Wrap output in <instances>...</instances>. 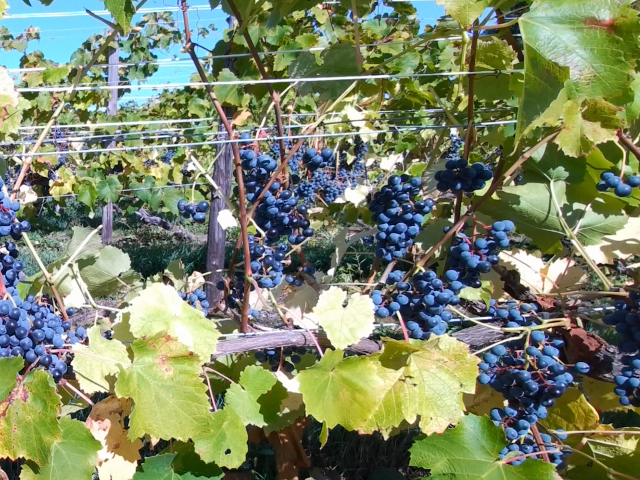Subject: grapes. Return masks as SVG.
Instances as JSON below:
<instances>
[{
  "mask_svg": "<svg viewBox=\"0 0 640 480\" xmlns=\"http://www.w3.org/2000/svg\"><path fill=\"white\" fill-rule=\"evenodd\" d=\"M530 339L531 346H528L525 352L537 357L538 367L547 371L552 377L545 382V385L539 386L538 381L533 379L531 371L516 367L526 363L525 353L520 354L521 358L510 357L503 344H496L491 349V353L485 355V362L479 364L483 372L477 378V382L483 386L491 385L509 400L510 407H505L503 410L492 408L489 411L493 423L500 425L506 416L516 417L518 420L507 425L505 434L509 439H520L525 435L523 444L508 443L504 446L497 455L499 460H503L510 451L519 452L521 455L541 452V448L535 444V437L528 433L529 429L539 419H545L548 416L546 407H552L555 404L554 399H559L568 389L569 384L574 381V375L567 372L564 365H560L553 359L561 356L560 348L566 345L563 338L549 339V334L534 330L530 334ZM543 341L551 344L545 345L540 351L538 343ZM499 356H502L503 362L511 367L510 370H503L500 374L495 373L501 369L498 362Z\"/></svg>",
  "mask_w": 640,
  "mask_h": 480,
  "instance_id": "01657485",
  "label": "grapes"
},
{
  "mask_svg": "<svg viewBox=\"0 0 640 480\" xmlns=\"http://www.w3.org/2000/svg\"><path fill=\"white\" fill-rule=\"evenodd\" d=\"M490 236L479 237L475 241L478 253H471V242L473 238L466 233L458 232L454 236V243L449 247L450 256L446 259L448 269L444 272V279L450 282L449 288H441L444 281L437 276L434 270L417 272L413 276L415 289L422 295L399 294L388 306H380L384 302V294L379 290H374L370 299L373 302L374 312L380 318L394 317L401 309V305L425 304V310H420L418 316L428 325L427 330L417 320H409L406 328L411 331V337L416 340H426L431 332L443 335L448 329L445 322L453 318V314L446 310L448 305H457L460 296L456 291L465 290L468 286L479 288L481 282L478 279L480 274H488L492 264H500L499 257L493 254V249L498 245L507 248L510 245L508 233L516 228L512 219L495 221L491 225Z\"/></svg>",
  "mask_w": 640,
  "mask_h": 480,
  "instance_id": "b958b902",
  "label": "grapes"
},
{
  "mask_svg": "<svg viewBox=\"0 0 640 480\" xmlns=\"http://www.w3.org/2000/svg\"><path fill=\"white\" fill-rule=\"evenodd\" d=\"M8 255L0 254V273L6 291L12 294L18 306L13 307L10 300L0 296V358L17 357L33 364L38 358L42 365L48 367L53 381L59 383L67 373L68 364L61 361L57 354L45 352V346L52 345L57 349L66 347L63 334H67L69 343L74 345L87 337L81 325L70 330L71 324L63 319L62 314L53 312V305L35 303V297L28 295L26 301L15 287L19 285L18 273L24 269V262L17 260L19 251L13 242L5 244Z\"/></svg>",
  "mask_w": 640,
  "mask_h": 480,
  "instance_id": "0513c4c2",
  "label": "grapes"
},
{
  "mask_svg": "<svg viewBox=\"0 0 640 480\" xmlns=\"http://www.w3.org/2000/svg\"><path fill=\"white\" fill-rule=\"evenodd\" d=\"M423 184L421 177L410 180L408 174H394L387 179L381 191L374 193L369 210L375 213L370 220L377 223L380 231L375 234L379 240L376 255L385 262L406 256L408 248L414 243L412 238L420 234L423 219L435 205L432 198L411 204V199L421 192L420 186Z\"/></svg>",
  "mask_w": 640,
  "mask_h": 480,
  "instance_id": "84f90ec7",
  "label": "grapes"
},
{
  "mask_svg": "<svg viewBox=\"0 0 640 480\" xmlns=\"http://www.w3.org/2000/svg\"><path fill=\"white\" fill-rule=\"evenodd\" d=\"M280 187V182L275 180L256 211L255 220L263 226L264 232L267 234L264 239L267 246H273L279 240V235H289L288 241L294 244H300L306 237L314 235L309 219L296 217L290 212L292 208L296 207L301 215L308 213V208L305 205L297 206L299 203L297 197L291 196L289 190L281 191L279 198L272 197Z\"/></svg>",
  "mask_w": 640,
  "mask_h": 480,
  "instance_id": "f8a65327",
  "label": "grapes"
},
{
  "mask_svg": "<svg viewBox=\"0 0 640 480\" xmlns=\"http://www.w3.org/2000/svg\"><path fill=\"white\" fill-rule=\"evenodd\" d=\"M493 178L494 174L480 162L467 166V160L464 158L448 160L445 170L435 173V189L442 193L450 190L453 194H457L458 190L474 192L482 190Z\"/></svg>",
  "mask_w": 640,
  "mask_h": 480,
  "instance_id": "5460f4e3",
  "label": "grapes"
},
{
  "mask_svg": "<svg viewBox=\"0 0 640 480\" xmlns=\"http://www.w3.org/2000/svg\"><path fill=\"white\" fill-rule=\"evenodd\" d=\"M249 240L252 279L258 281L261 288L278 286L285 269L282 260L286 257V253L292 250V246L287 242H280L277 248H265L262 244L256 245L253 233H249ZM263 265L273 267L268 271L270 278H262L264 276Z\"/></svg>",
  "mask_w": 640,
  "mask_h": 480,
  "instance_id": "83cd7487",
  "label": "grapes"
},
{
  "mask_svg": "<svg viewBox=\"0 0 640 480\" xmlns=\"http://www.w3.org/2000/svg\"><path fill=\"white\" fill-rule=\"evenodd\" d=\"M243 171H247L243 178L246 198L254 202L262 188L266 185L271 176V172L277 167V160L269 154H257L253 149L239 148Z\"/></svg>",
  "mask_w": 640,
  "mask_h": 480,
  "instance_id": "e5b3c951",
  "label": "grapes"
},
{
  "mask_svg": "<svg viewBox=\"0 0 640 480\" xmlns=\"http://www.w3.org/2000/svg\"><path fill=\"white\" fill-rule=\"evenodd\" d=\"M620 364L623 366L620 369L622 375L614 378V383L618 385L615 393L620 396L619 403L622 406H629L631 404L629 397L635 393V388L640 386V378L634 375L635 369H640V352L632 356H623Z\"/></svg>",
  "mask_w": 640,
  "mask_h": 480,
  "instance_id": "2adb6a1f",
  "label": "grapes"
},
{
  "mask_svg": "<svg viewBox=\"0 0 640 480\" xmlns=\"http://www.w3.org/2000/svg\"><path fill=\"white\" fill-rule=\"evenodd\" d=\"M21 209L18 202H13L5 193L0 190V237L10 235L14 240L19 241L21 233H28L31 230V223L28 220L21 222L14 220L17 218V211Z\"/></svg>",
  "mask_w": 640,
  "mask_h": 480,
  "instance_id": "ef6de9ee",
  "label": "grapes"
},
{
  "mask_svg": "<svg viewBox=\"0 0 640 480\" xmlns=\"http://www.w3.org/2000/svg\"><path fill=\"white\" fill-rule=\"evenodd\" d=\"M599 179L601 181L595 185V189L599 192L613 189V194L618 199L629 198L633 193V188H637L640 185L638 176H631L626 183L620 176H616L614 171H603L599 175Z\"/></svg>",
  "mask_w": 640,
  "mask_h": 480,
  "instance_id": "1ff8f66d",
  "label": "grapes"
},
{
  "mask_svg": "<svg viewBox=\"0 0 640 480\" xmlns=\"http://www.w3.org/2000/svg\"><path fill=\"white\" fill-rule=\"evenodd\" d=\"M496 304L495 299H490V308L488 309V313L495 318H510L514 317L512 322L506 323L507 328H519L521 324H525L527 322V318L523 317L520 311L516 307H511L515 305V301H506L504 306L511 307L508 308H498L494 306Z\"/></svg>",
  "mask_w": 640,
  "mask_h": 480,
  "instance_id": "54f908b8",
  "label": "grapes"
},
{
  "mask_svg": "<svg viewBox=\"0 0 640 480\" xmlns=\"http://www.w3.org/2000/svg\"><path fill=\"white\" fill-rule=\"evenodd\" d=\"M210 209V203L206 199H202L199 203H188L186 200L177 202V210L181 212L184 219L195 220L198 223H204L207 219L206 213Z\"/></svg>",
  "mask_w": 640,
  "mask_h": 480,
  "instance_id": "91a60905",
  "label": "grapes"
},
{
  "mask_svg": "<svg viewBox=\"0 0 640 480\" xmlns=\"http://www.w3.org/2000/svg\"><path fill=\"white\" fill-rule=\"evenodd\" d=\"M315 148H307L304 151L303 162L307 164V168L311 172H315L318 167L325 168L328 165V161L333 156V150L331 148H324L319 155Z\"/></svg>",
  "mask_w": 640,
  "mask_h": 480,
  "instance_id": "dcf779d0",
  "label": "grapes"
},
{
  "mask_svg": "<svg viewBox=\"0 0 640 480\" xmlns=\"http://www.w3.org/2000/svg\"><path fill=\"white\" fill-rule=\"evenodd\" d=\"M177 295L182 299L187 300L191 308H195L197 306V302L200 301L199 305L201 306L200 310L202 311V315L204 317L208 316L207 309L210 307V304L207 299L208 293L204 289L195 288L192 294H187L186 292L178 290Z\"/></svg>",
  "mask_w": 640,
  "mask_h": 480,
  "instance_id": "802abce8",
  "label": "grapes"
},
{
  "mask_svg": "<svg viewBox=\"0 0 640 480\" xmlns=\"http://www.w3.org/2000/svg\"><path fill=\"white\" fill-rule=\"evenodd\" d=\"M404 277V272L400 269H395L393 272H390L386 275L385 283L387 285H392L395 282V288L400 292H412L414 290V285L410 282L403 283L401 282Z\"/></svg>",
  "mask_w": 640,
  "mask_h": 480,
  "instance_id": "012428b0",
  "label": "grapes"
},
{
  "mask_svg": "<svg viewBox=\"0 0 640 480\" xmlns=\"http://www.w3.org/2000/svg\"><path fill=\"white\" fill-rule=\"evenodd\" d=\"M573 454V451H560L557 453H550V457H553V464H558L556 469L566 468L567 455Z\"/></svg>",
  "mask_w": 640,
  "mask_h": 480,
  "instance_id": "9fbda902",
  "label": "grapes"
}]
</instances>
